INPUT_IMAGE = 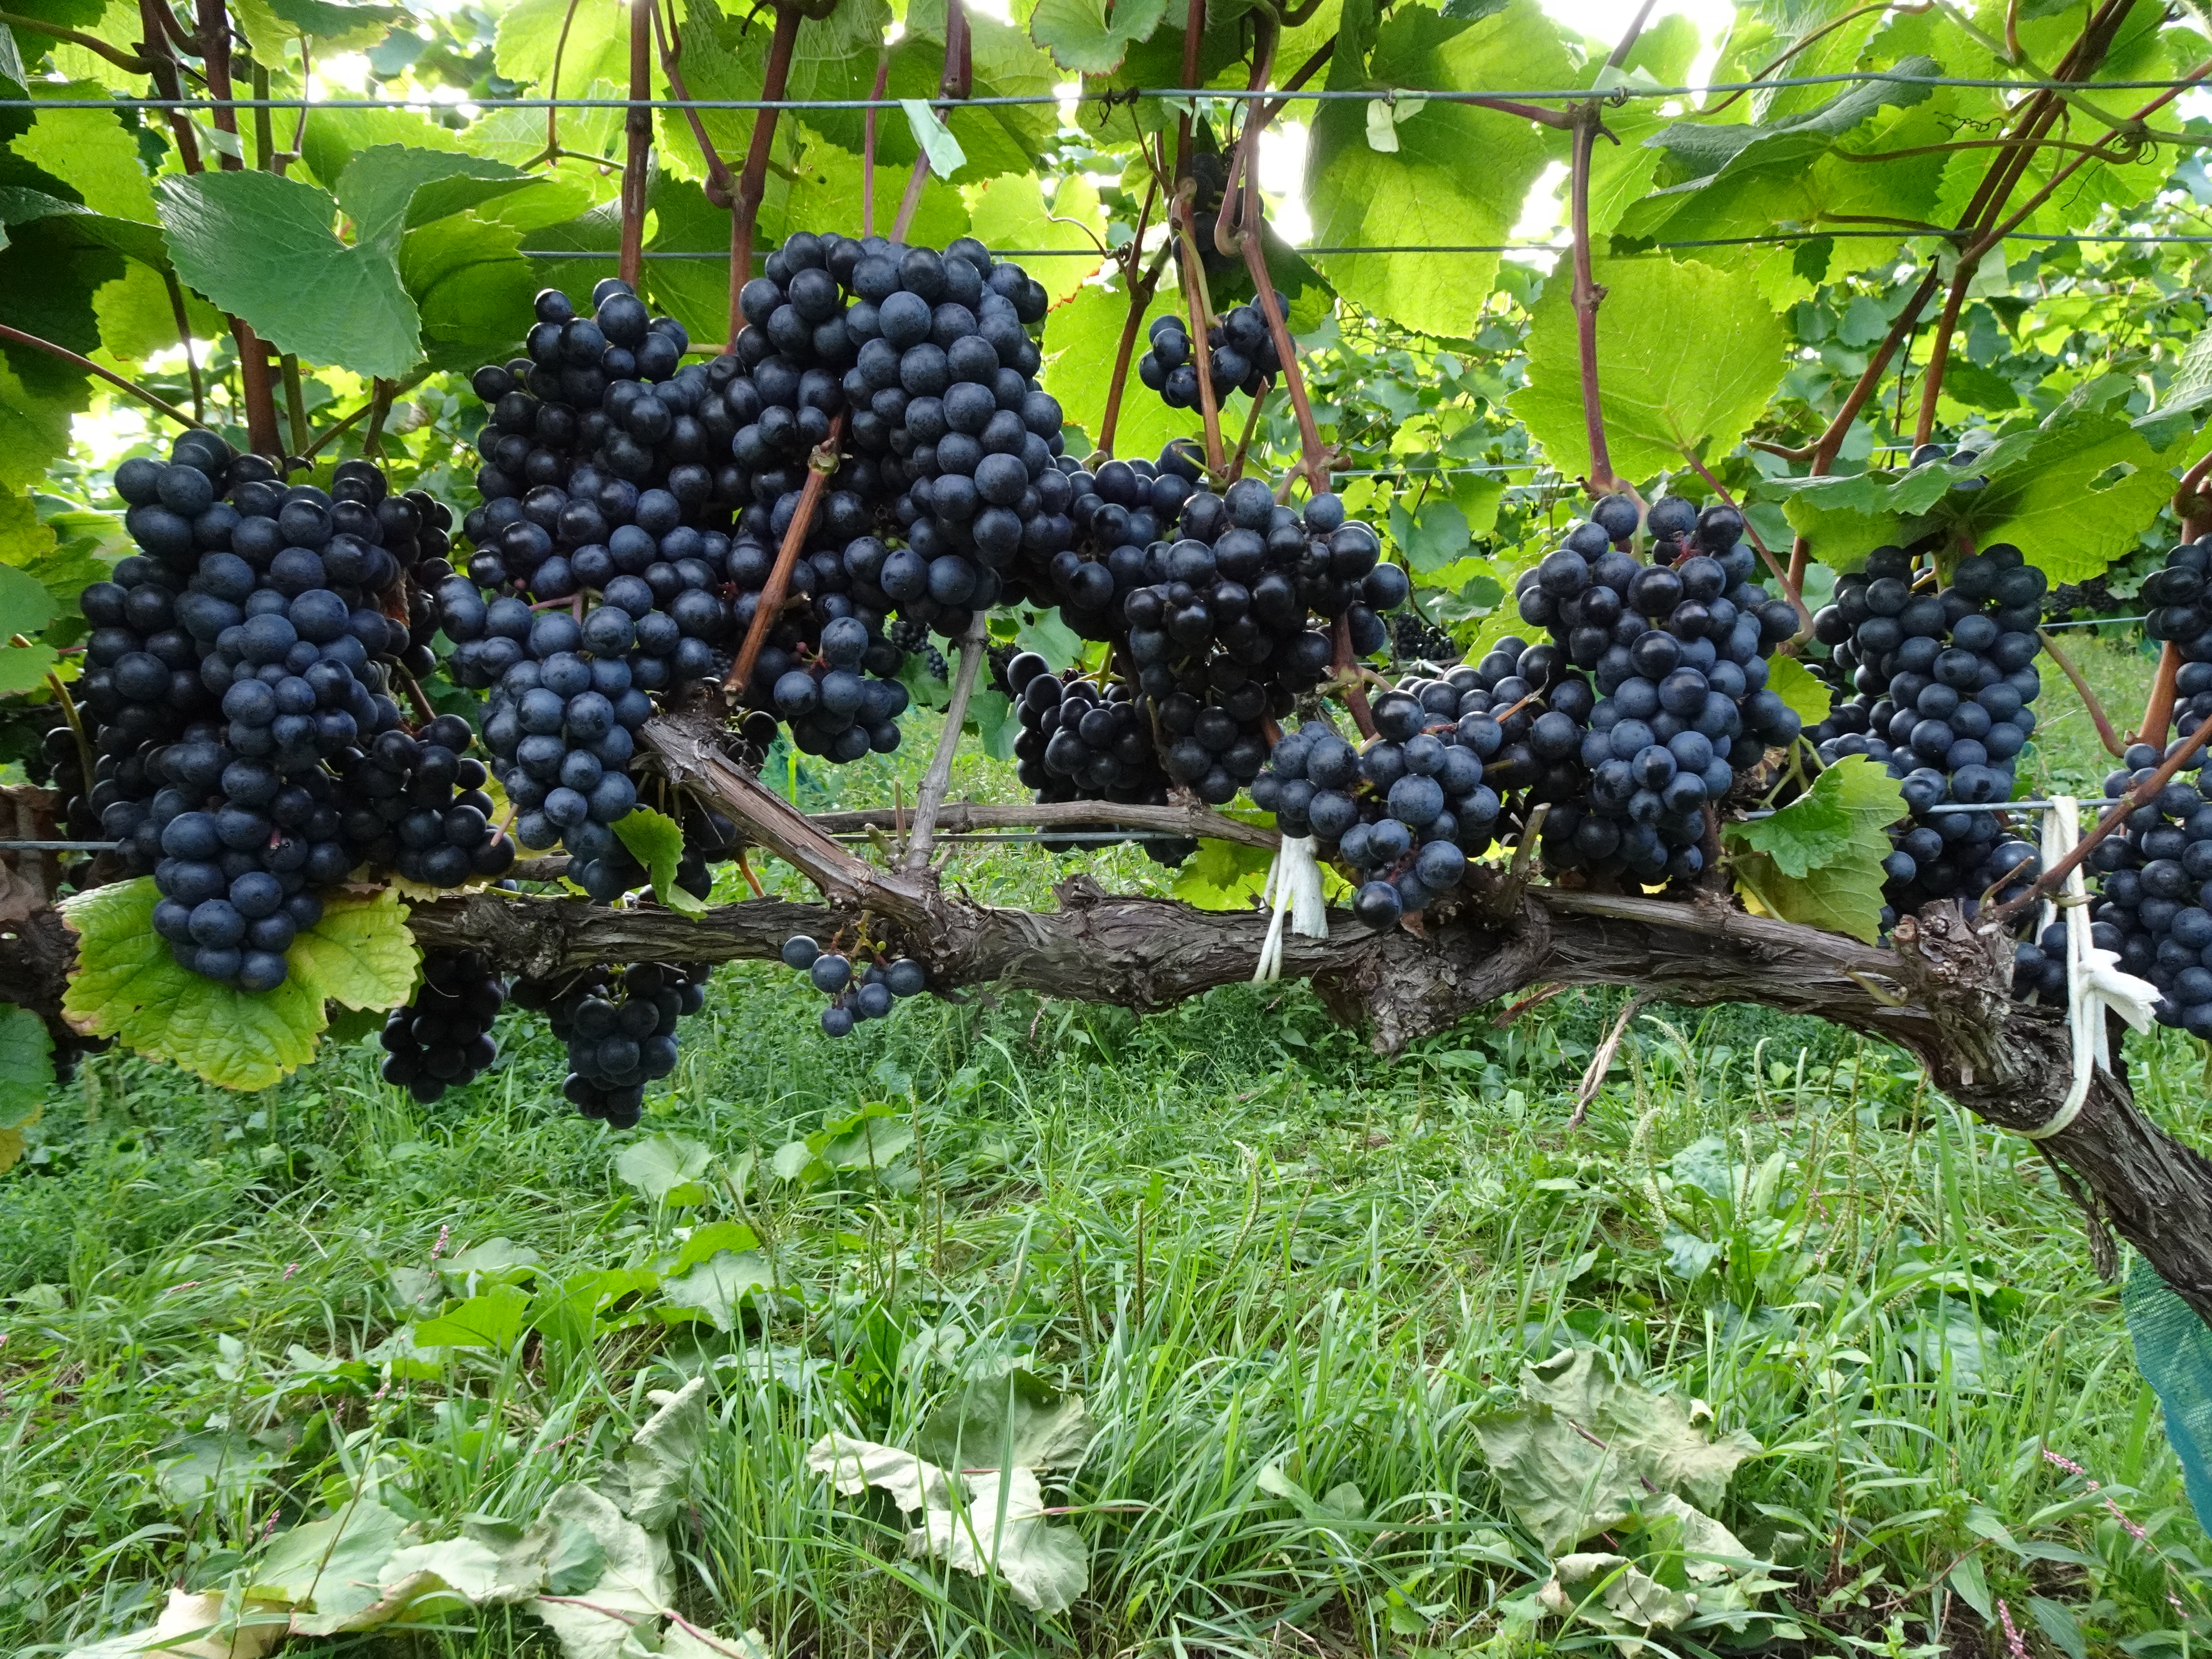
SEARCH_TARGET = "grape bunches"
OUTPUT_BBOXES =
[2092,737,2212,1039]
[1808,733,1943,933]
[1813,544,2047,895]
[667,352,746,514]
[380,944,503,1104]
[1045,696,1196,861]
[725,451,907,762]
[1007,652,1133,851]
[319,714,515,887]
[1962,842,2120,1002]
[325,460,453,675]
[437,469,730,903]
[1525,758,1630,880]
[1514,493,1800,885]
[1049,439,1211,630]
[2138,532,2211,747]
[1139,291,1290,416]
[115,427,411,770]
[781,935,925,1037]
[509,958,709,1129]
[80,551,233,868]
[1249,691,1500,931]
[1123,479,1407,804]
[1395,635,1594,785]
[842,235,1069,638]
[136,721,347,992]
[1802,662,1870,746]
[731,232,866,475]
[467,276,687,501]
[42,700,108,894]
